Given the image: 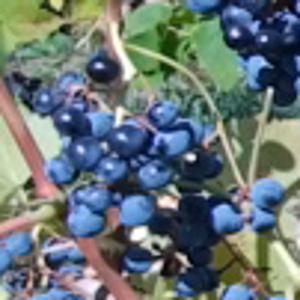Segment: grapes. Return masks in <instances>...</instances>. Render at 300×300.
<instances>
[{
  "label": "grapes",
  "mask_w": 300,
  "mask_h": 300,
  "mask_svg": "<svg viewBox=\"0 0 300 300\" xmlns=\"http://www.w3.org/2000/svg\"><path fill=\"white\" fill-rule=\"evenodd\" d=\"M33 300H87V297L72 287L52 286L47 293H37Z\"/></svg>",
  "instance_id": "6"
},
{
  "label": "grapes",
  "mask_w": 300,
  "mask_h": 300,
  "mask_svg": "<svg viewBox=\"0 0 300 300\" xmlns=\"http://www.w3.org/2000/svg\"><path fill=\"white\" fill-rule=\"evenodd\" d=\"M152 266V253L146 247L129 249L121 259V267L128 274H142Z\"/></svg>",
  "instance_id": "5"
},
{
  "label": "grapes",
  "mask_w": 300,
  "mask_h": 300,
  "mask_svg": "<svg viewBox=\"0 0 300 300\" xmlns=\"http://www.w3.org/2000/svg\"><path fill=\"white\" fill-rule=\"evenodd\" d=\"M194 13L222 22L224 45L255 91L275 90L280 106L292 105L300 90V0H188Z\"/></svg>",
  "instance_id": "2"
},
{
  "label": "grapes",
  "mask_w": 300,
  "mask_h": 300,
  "mask_svg": "<svg viewBox=\"0 0 300 300\" xmlns=\"http://www.w3.org/2000/svg\"><path fill=\"white\" fill-rule=\"evenodd\" d=\"M34 250L32 234L27 230H16L0 247V275L8 274L14 265V256H27Z\"/></svg>",
  "instance_id": "3"
},
{
  "label": "grapes",
  "mask_w": 300,
  "mask_h": 300,
  "mask_svg": "<svg viewBox=\"0 0 300 300\" xmlns=\"http://www.w3.org/2000/svg\"><path fill=\"white\" fill-rule=\"evenodd\" d=\"M47 266H57L66 259L68 264H63L58 268L59 275H73L81 273L82 267L79 264L85 262L83 255L74 247L63 248L57 252L45 255Z\"/></svg>",
  "instance_id": "4"
},
{
  "label": "grapes",
  "mask_w": 300,
  "mask_h": 300,
  "mask_svg": "<svg viewBox=\"0 0 300 300\" xmlns=\"http://www.w3.org/2000/svg\"><path fill=\"white\" fill-rule=\"evenodd\" d=\"M118 74L111 52L90 57L87 75L93 82L109 85ZM87 75L71 66L50 85L29 94L31 110L40 117L51 116L52 130L61 137L62 152L46 162L45 175L55 185L72 187L64 206L66 232L77 239L101 236L108 228L104 212L117 206L122 227L169 235L186 249L192 267L175 280L181 297L215 290L219 274L210 266L215 260L212 248L245 227L252 234L272 232L284 187L270 178L253 181V207L247 215L223 197L207 200L194 194L188 183L217 178L224 170L223 154L202 145L212 136V125L194 115H178L171 100L152 102L141 120L118 119L79 95L87 86Z\"/></svg>",
  "instance_id": "1"
},
{
  "label": "grapes",
  "mask_w": 300,
  "mask_h": 300,
  "mask_svg": "<svg viewBox=\"0 0 300 300\" xmlns=\"http://www.w3.org/2000/svg\"><path fill=\"white\" fill-rule=\"evenodd\" d=\"M220 300H257V293L246 284H232L221 290Z\"/></svg>",
  "instance_id": "7"
}]
</instances>
